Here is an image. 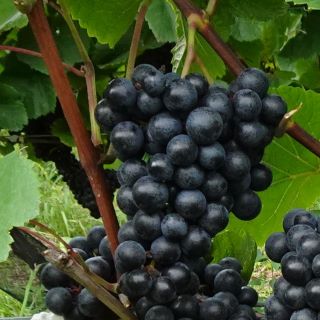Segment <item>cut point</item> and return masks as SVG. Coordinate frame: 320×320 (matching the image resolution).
<instances>
[{
  "instance_id": "6a23745f",
  "label": "cut point",
  "mask_w": 320,
  "mask_h": 320,
  "mask_svg": "<svg viewBox=\"0 0 320 320\" xmlns=\"http://www.w3.org/2000/svg\"><path fill=\"white\" fill-rule=\"evenodd\" d=\"M187 23H188V52H187V57L185 60V64H184L180 79H182V80L186 79V75L189 74V69H190L191 63L195 62L199 65L201 71L203 72L208 85H214V81H213L212 77L208 73L207 69L205 68L204 64L202 63L201 59L199 58V56L197 55V52L195 50L194 35H195V31L198 27L197 23L190 20V19H187Z\"/></svg>"
}]
</instances>
